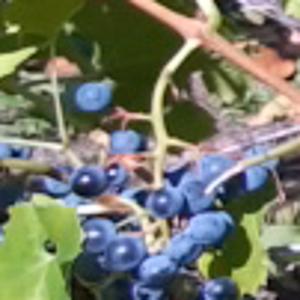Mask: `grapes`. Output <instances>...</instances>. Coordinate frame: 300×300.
I'll use <instances>...</instances> for the list:
<instances>
[{"instance_id": "obj_3", "label": "grapes", "mask_w": 300, "mask_h": 300, "mask_svg": "<svg viewBox=\"0 0 300 300\" xmlns=\"http://www.w3.org/2000/svg\"><path fill=\"white\" fill-rule=\"evenodd\" d=\"M280 167V160L274 159L245 170L241 174L240 189L246 193H254L265 186L272 178V172Z\"/></svg>"}, {"instance_id": "obj_5", "label": "grapes", "mask_w": 300, "mask_h": 300, "mask_svg": "<svg viewBox=\"0 0 300 300\" xmlns=\"http://www.w3.org/2000/svg\"><path fill=\"white\" fill-rule=\"evenodd\" d=\"M264 154V149L262 147L249 148L242 156L244 161H248L251 158L258 157Z\"/></svg>"}, {"instance_id": "obj_2", "label": "grapes", "mask_w": 300, "mask_h": 300, "mask_svg": "<svg viewBox=\"0 0 300 300\" xmlns=\"http://www.w3.org/2000/svg\"><path fill=\"white\" fill-rule=\"evenodd\" d=\"M75 109L81 113H96L114 106V93L107 84L81 83L73 93Z\"/></svg>"}, {"instance_id": "obj_4", "label": "grapes", "mask_w": 300, "mask_h": 300, "mask_svg": "<svg viewBox=\"0 0 300 300\" xmlns=\"http://www.w3.org/2000/svg\"><path fill=\"white\" fill-rule=\"evenodd\" d=\"M240 295L241 285L232 276L218 277L199 289L201 300H233Z\"/></svg>"}, {"instance_id": "obj_1", "label": "grapes", "mask_w": 300, "mask_h": 300, "mask_svg": "<svg viewBox=\"0 0 300 300\" xmlns=\"http://www.w3.org/2000/svg\"><path fill=\"white\" fill-rule=\"evenodd\" d=\"M113 155L97 166L60 163L54 172L69 183L40 177L48 196L62 198L82 221V251L97 255L108 273H132L131 300H163L180 268L194 264L203 251L214 252L230 238L235 219L216 210L227 202L230 186L208 184L228 173L235 162L227 155L198 159L197 171L178 166L150 185L157 154L145 148L139 130L120 128L109 142Z\"/></svg>"}]
</instances>
